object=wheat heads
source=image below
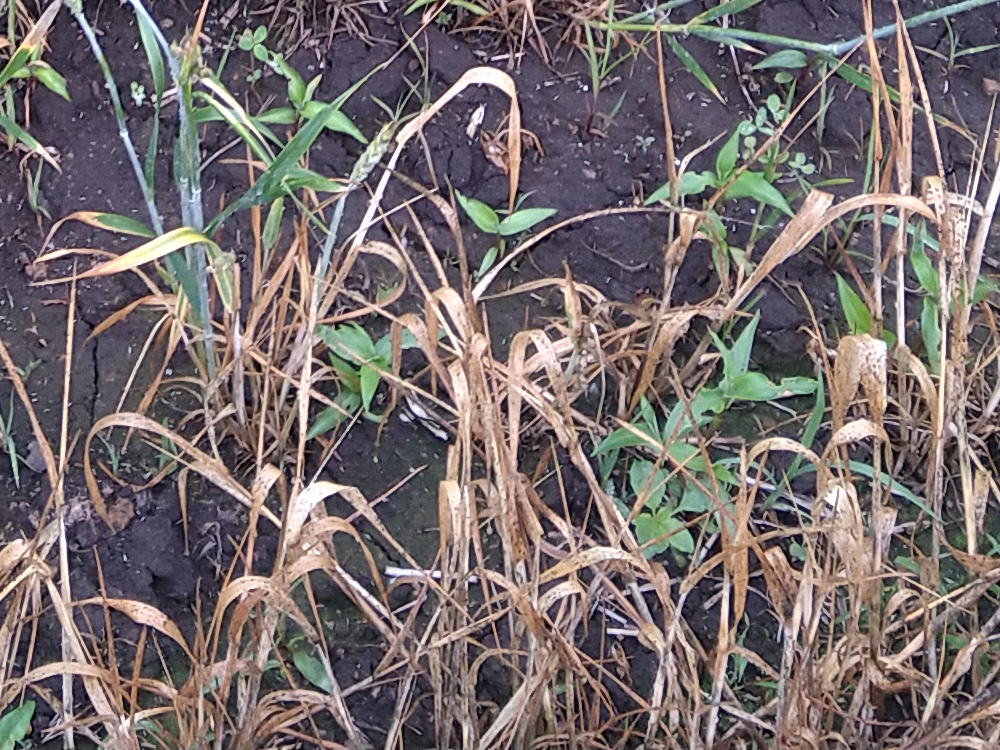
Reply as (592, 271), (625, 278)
(860, 339), (886, 416)
(483, 401), (500, 473)
(974, 468), (989, 530)
(352, 123), (395, 186)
